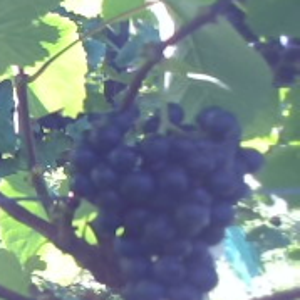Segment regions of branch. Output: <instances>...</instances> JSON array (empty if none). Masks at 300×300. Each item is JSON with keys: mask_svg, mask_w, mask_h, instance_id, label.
Masks as SVG:
<instances>
[{"mask_svg": "<svg viewBox=\"0 0 300 300\" xmlns=\"http://www.w3.org/2000/svg\"><path fill=\"white\" fill-rule=\"evenodd\" d=\"M160 2H164V0L149 1L135 9L126 11L112 18L111 20H108V22L103 23L97 26V28H94L93 30L77 37L73 43L62 49L59 53L54 54L28 78L24 75H19L15 79L17 135L19 137V143L23 155L27 180L31 186L34 196L44 210V216L46 219L29 209L26 205L18 202H12L11 199L5 194H0V209L4 214L13 218L30 231L49 239V241L52 243H57L58 248L61 250H66L70 246L68 225L80 206V197L76 193L69 194L66 203L60 210L44 185V182L40 176L36 151L29 126L28 82H31L40 76L51 65L52 61L63 55L66 51L70 50L80 40L92 35L105 26L113 24V22L129 14L142 10L146 6Z\"/></svg>", "mask_w": 300, "mask_h": 300, "instance_id": "1", "label": "branch"}, {"mask_svg": "<svg viewBox=\"0 0 300 300\" xmlns=\"http://www.w3.org/2000/svg\"><path fill=\"white\" fill-rule=\"evenodd\" d=\"M218 16V11L215 8H209L201 15L189 20L178 28L175 32L167 38L161 40L157 46H154L148 54L139 63L137 70L118 105V111L121 114H126L130 110V106L137 95L142 83L146 79L151 66L157 61L159 57L164 55L167 50L172 49L175 45L185 39L188 35L207 25Z\"/></svg>", "mask_w": 300, "mask_h": 300, "instance_id": "2", "label": "branch"}]
</instances>
